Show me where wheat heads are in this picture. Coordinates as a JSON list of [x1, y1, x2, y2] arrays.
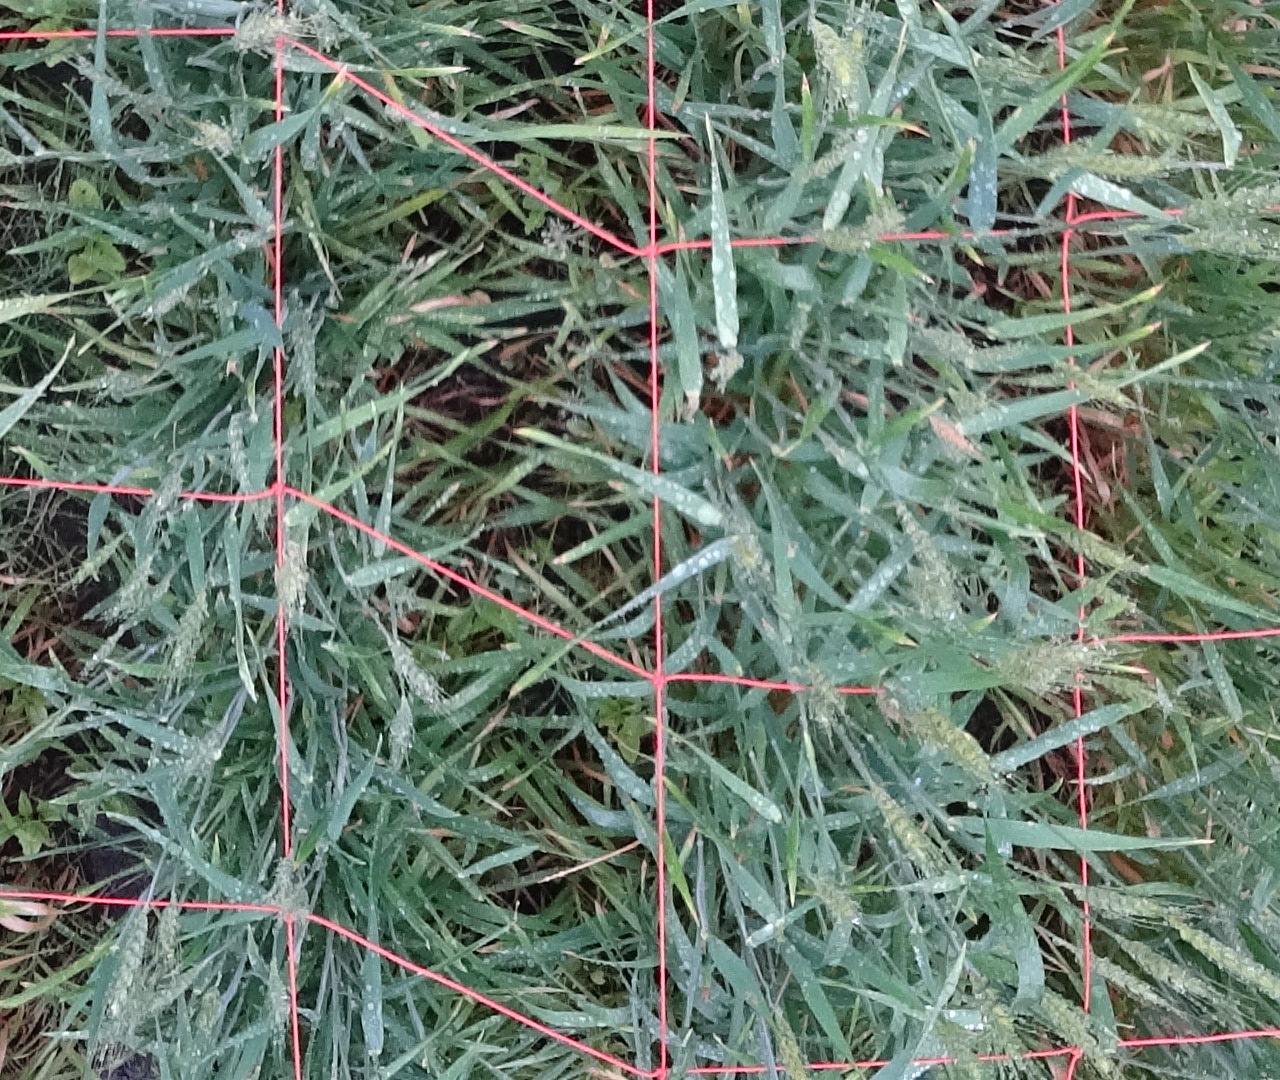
[[813, 872, 864, 928], [925, 710, 991, 778], [1061, 526, 1135, 573], [226, 11, 301, 52], [1066, 938, 1142, 994], [740, 527, 771, 582], [1019, 643, 1099, 678], [270, 542, 302, 615], [1065, 575, 1135, 615], [920, 323, 977, 355], [122, 554, 158, 598], [1158, 166, 1280, 231], [179, 598, 209, 655], [1123, 939, 1231, 1006], [773, 1021, 810, 1079], [1117, 96, 1211, 140], [893, 495, 942, 575], [76, 535, 121, 579], [807, 661, 844, 717], [269, 862, 297, 904], [1173, 226, 1274, 262], [1039, 985, 1110, 1057], [153, 287, 192, 322], [1046, 356, 1124, 412], [805, 223, 893, 251], [804, 138, 872, 171], [261, 971, 289, 1026], [109, 917, 149, 1009], [160, 904, 186, 950], [805, 24, 861, 99], [1064, 149, 1169, 180], [385, 636, 443, 697], [1068, 884, 1165, 921], [1186, 924, 1278, 1001], [871, 790, 929, 860], [969, 974, 1015, 1051], [191, 110, 233, 153]]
